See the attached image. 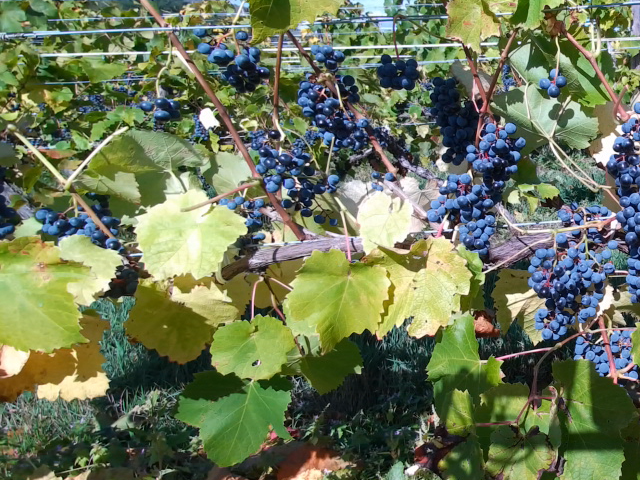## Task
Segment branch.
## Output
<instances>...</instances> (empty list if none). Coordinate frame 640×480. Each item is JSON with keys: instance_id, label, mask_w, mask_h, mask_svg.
Here are the masks:
<instances>
[{"instance_id": "1", "label": "branch", "mask_w": 640, "mask_h": 480, "mask_svg": "<svg viewBox=\"0 0 640 480\" xmlns=\"http://www.w3.org/2000/svg\"><path fill=\"white\" fill-rule=\"evenodd\" d=\"M167 37L174 44L176 49L179 51L180 55L185 60V63L195 72L197 76V80L199 81L200 85L206 91V94L208 95V98L212 101L213 106L220 112V115L224 123L228 126L227 130L232 135L235 143L237 144L239 151L242 153L247 165L249 166L250 174L258 182L260 186H263L265 184V181L263 180L264 176L256 170L255 162L252 156L250 155L248 149L244 145V142L241 139L240 134L238 133L236 128L233 126V121L228 115L226 108L220 103L218 96L214 93L213 88L209 85L206 76L203 74L202 70L197 66V64L192 60V57L186 53V49L184 48L180 40L172 32H169L167 34Z\"/></svg>"}, {"instance_id": "2", "label": "branch", "mask_w": 640, "mask_h": 480, "mask_svg": "<svg viewBox=\"0 0 640 480\" xmlns=\"http://www.w3.org/2000/svg\"><path fill=\"white\" fill-rule=\"evenodd\" d=\"M517 32H518V29L514 28L509 33L508 39L506 41L505 48L503 49V53L501 54V57H500L497 65H496L495 72H494V74H493V76H492V78H491V80H490V82L488 84L486 92H485V90H484V88H483V86H482V84L480 82V79H479L480 75L478 74L476 66H475V64H474V62H473V60L471 58V55H470L468 47L467 46L463 47V51H464L466 60L468 62V65L470 66L471 71H472L473 76H474V81H475L476 87H477V89H478V91H479V93H480V95L482 97V100L484 102V104L482 105V109H481V111L479 113L477 132H476L475 140H474V146L475 147H478L479 143H480V137L482 135V128H483L484 116H485L486 111H487V114L489 116L493 115L492 106H491V104L489 102V98L491 96V93H492L493 87L495 85V82L497 81V78H498V76L500 74V70L502 68V65H503L504 61L506 60L508 52L510 51V47H511V43L513 41V38L517 34Z\"/></svg>"}, {"instance_id": "3", "label": "branch", "mask_w": 640, "mask_h": 480, "mask_svg": "<svg viewBox=\"0 0 640 480\" xmlns=\"http://www.w3.org/2000/svg\"><path fill=\"white\" fill-rule=\"evenodd\" d=\"M284 36L280 35L277 45H276V58L274 64V96H273V124L272 128L274 130L278 129V104H279V85H280V77H281V48L283 45Z\"/></svg>"}, {"instance_id": "4", "label": "branch", "mask_w": 640, "mask_h": 480, "mask_svg": "<svg viewBox=\"0 0 640 480\" xmlns=\"http://www.w3.org/2000/svg\"><path fill=\"white\" fill-rule=\"evenodd\" d=\"M562 34L566 36V39L568 41L571 42V44L577 49L579 50L589 61V63L592 65L593 70L595 71V73L599 76L601 82L604 84L609 96L615 101L618 102L619 101V97L613 92V89L611 87V85L609 84V82L607 81V79L605 78V75L603 74V72L599 69L596 61L594 60L593 56L581 45H579L576 41L575 36L569 32L568 30H563Z\"/></svg>"}, {"instance_id": "5", "label": "branch", "mask_w": 640, "mask_h": 480, "mask_svg": "<svg viewBox=\"0 0 640 480\" xmlns=\"http://www.w3.org/2000/svg\"><path fill=\"white\" fill-rule=\"evenodd\" d=\"M616 220H617L616 216H611L608 221H599V222L589 223V224L574 225L572 227H567V228H563V229H540V230L520 229L519 233L520 234H524V235L565 234L566 232H575L577 230H584V229L602 227V226H605V225H609V224H611L612 222H614Z\"/></svg>"}, {"instance_id": "6", "label": "branch", "mask_w": 640, "mask_h": 480, "mask_svg": "<svg viewBox=\"0 0 640 480\" xmlns=\"http://www.w3.org/2000/svg\"><path fill=\"white\" fill-rule=\"evenodd\" d=\"M14 135L18 138V140L24 145V147L36 158L41 160L46 164L47 168L51 171V173L62 183L66 184L68 179L62 175V173L54 166L53 162L45 156L43 153L38 151L34 146L30 143V141L24 136L22 132L16 130Z\"/></svg>"}, {"instance_id": "7", "label": "branch", "mask_w": 640, "mask_h": 480, "mask_svg": "<svg viewBox=\"0 0 640 480\" xmlns=\"http://www.w3.org/2000/svg\"><path fill=\"white\" fill-rule=\"evenodd\" d=\"M285 36L293 43L296 45V47L299 49V51L301 52V54L306 58L307 62L309 63V65L314 68L316 75L319 77L320 80L323 81L324 84H326L336 95L340 94V90L330 81L328 80L321 72L322 69L313 61L312 57L309 55V53L307 51L304 50L303 45L300 43V40L298 38H296V36L290 32L289 30L285 31Z\"/></svg>"}, {"instance_id": "8", "label": "branch", "mask_w": 640, "mask_h": 480, "mask_svg": "<svg viewBox=\"0 0 640 480\" xmlns=\"http://www.w3.org/2000/svg\"><path fill=\"white\" fill-rule=\"evenodd\" d=\"M69 195L79 202L83 210L88 214V216L93 220L95 225L98 227L100 231H102L108 238H112L114 236L113 231L107 227L99 218V216L94 212V210L90 207V205L86 202L85 198L78 194L74 188L69 190Z\"/></svg>"}, {"instance_id": "9", "label": "branch", "mask_w": 640, "mask_h": 480, "mask_svg": "<svg viewBox=\"0 0 640 480\" xmlns=\"http://www.w3.org/2000/svg\"><path fill=\"white\" fill-rule=\"evenodd\" d=\"M268 199L272 203V205L276 208L279 215L285 220V222L291 227L292 231L296 234L297 238H305L308 235V232L305 228L299 224H296L291 216L286 212L284 207L279 203L275 194L273 192H269L267 194Z\"/></svg>"}, {"instance_id": "10", "label": "branch", "mask_w": 640, "mask_h": 480, "mask_svg": "<svg viewBox=\"0 0 640 480\" xmlns=\"http://www.w3.org/2000/svg\"><path fill=\"white\" fill-rule=\"evenodd\" d=\"M598 317H599V333L607 348L609 370L611 371L612 383L617 384L618 380H617L616 368L614 367L612 346L604 330V314L599 313Z\"/></svg>"}, {"instance_id": "11", "label": "branch", "mask_w": 640, "mask_h": 480, "mask_svg": "<svg viewBox=\"0 0 640 480\" xmlns=\"http://www.w3.org/2000/svg\"><path fill=\"white\" fill-rule=\"evenodd\" d=\"M369 142L372 144L379 158L382 160L384 166L389 170L390 173H394L397 171V167L393 163V161L387 156L385 151L381 148L380 144L374 139L372 135L368 136Z\"/></svg>"}, {"instance_id": "12", "label": "branch", "mask_w": 640, "mask_h": 480, "mask_svg": "<svg viewBox=\"0 0 640 480\" xmlns=\"http://www.w3.org/2000/svg\"><path fill=\"white\" fill-rule=\"evenodd\" d=\"M137 2L139 4H141L142 6H145L147 8V10L149 11V13L152 15V17L162 26V27H167L169 25V22L167 20H165L157 11L156 8L153 6V4L148 1V0H137Z\"/></svg>"}, {"instance_id": "13", "label": "branch", "mask_w": 640, "mask_h": 480, "mask_svg": "<svg viewBox=\"0 0 640 480\" xmlns=\"http://www.w3.org/2000/svg\"><path fill=\"white\" fill-rule=\"evenodd\" d=\"M344 106H345L346 108L350 109L351 111H353V112H354V114H355V117H356V118H361V117H362V114H361V112L357 109V107H356V106H354V105H352V104H350L348 101H345V102H344Z\"/></svg>"}, {"instance_id": "14", "label": "branch", "mask_w": 640, "mask_h": 480, "mask_svg": "<svg viewBox=\"0 0 640 480\" xmlns=\"http://www.w3.org/2000/svg\"><path fill=\"white\" fill-rule=\"evenodd\" d=\"M617 110H618V112L622 115V116L620 117V121H621V122H624L625 120H628V119H629V115L625 112V109H624V108H622V105H621V104H618V105H617Z\"/></svg>"}]
</instances>
